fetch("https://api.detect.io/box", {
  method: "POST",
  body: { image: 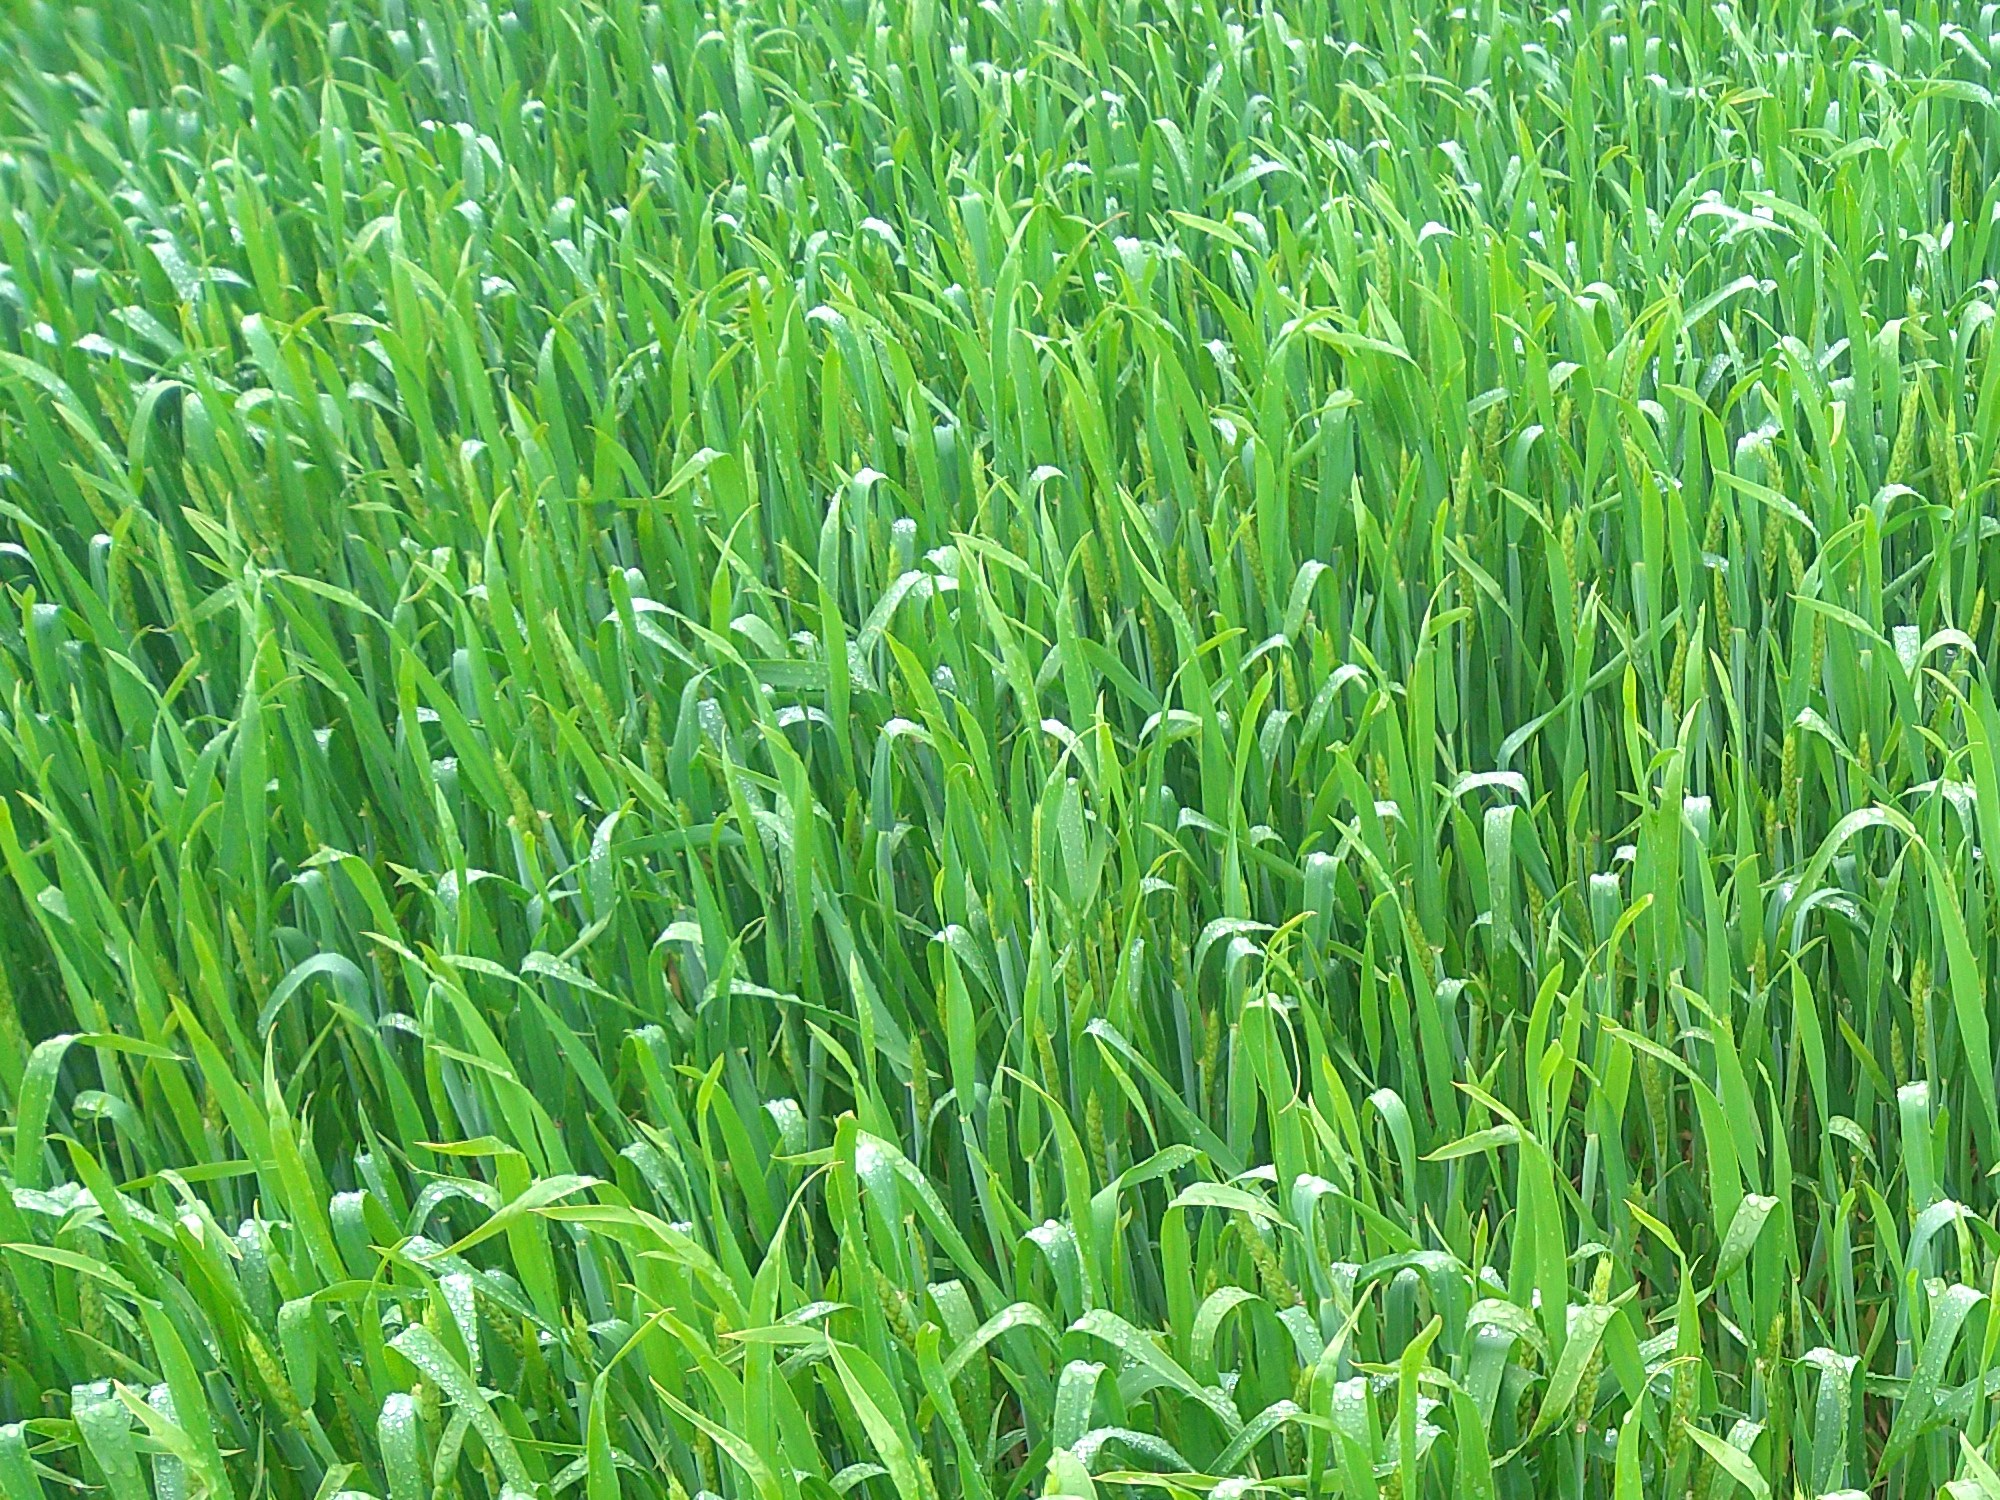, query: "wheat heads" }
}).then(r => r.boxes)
[647,699,661,778]
[315,270,354,374]
[547,623,606,751]
[537,188,551,219]
[1063,943,1080,1012]
[853,450,862,476]
[448,433,475,512]
[454,1477,474,1500]
[276,252,291,293]
[1399,444,1408,481]
[228,905,267,1004]
[356,486,375,534]
[1573,274,1582,298]
[1977,326,1990,371]
[1585,830,1596,872]
[1323,630,1335,664]
[965,241,992,348]
[1761,1316,1784,1363]
[1454,445,1473,519]
[1816,969,1827,1033]
[907,440,922,504]
[595,681,620,735]
[1645,1053,1665,1154]
[1575,894,1592,936]
[1848,1159,1864,1223]
[1781,732,1801,831]
[1119,341,1144,415]
[1175,548,1192,612]
[1472,1006,1482,1059]
[371,412,422,506]
[1289,1365,1316,1476]
[424,189,447,277]
[599,273,610,298]
[605,300,618,375]
[934,980,949,1021]
[70,419,90,462]
[553,128,565,161]
[1239,511,1269,595]
[1910,1186,1918,1233]
[741,383,752,412]
[1222,442,1249,504]
[1137,594,1161,685]
[1579,1349,1605,1422]
[1036,1184,1045,1218]
[1589,946,1596,970]
[871,245,886,296]
[1383,522,1403,583]
[994,704,1004,768]
[1712,566,1733,664]
[516,457,534,522]
[350,1046,375,1124]
[1378,1143,1392,1197]
[1028,804,1039,903]
[1171,935,1188,997]
[869,1268,913,1351]
[850,813,865,858]
[414,1454,435,1488]
[1911,957,1930,1049]
[0,1274,28,1357]
[1967,582,1985,660]
[911,1229,931,1285]
[114,547,136,624]
[885,543,902,593]
[720,7,733,40]
[1925,431,1946,498]
[1204,1009,1222,1081]
[1239,880,1251,918]
[1337,89,1352,142]
[1694,1455,1717,1500]
[1808,613,1825,686]
[421,1303,437,1425]
[1621,333,1639,403]
[1794,1294,1802,1346]
[191,3,213,65]
[1027,1019,1065,1109]
[703,733,727,788]
[904,0,915,39]
[1101,898,1119,988]
[1734,521,1746,564]
[876,291,926,369]
[217,428,276,539]
[1733,309,1742,341]
[489,752,552,846]
[1528,872,1542,930]
[1515,1338,1531,1434]
[866,504,883,566]
[1241,1218,1295,1312]
[451,245,481,348]
[1891,1023,1908,1082]
[482,1452,502,1500]
[950,517,962,535]
[553,167,567,197]
[95,998,111,1034]
[1085,936,1102,1008]
[1836,1173,1846,1200]
[1159,884,1166,947]
[1196,451,1209,515]
[839,383,864,446]
[1756,939,1768,990]
[1375,233,1390,307]
[1482,404,1500,461]
[985,888,1000,940]
[1457,534,1479,647]
[709,129,724,183]
[0,985,31,1058]
[1859,731,1872,809]
[419,298,445,347]
[1884,381,1924,485]
[208,465,258,543]
[1137,427,1157,502]
[508,164,556,278]
[1405,909,1438,981]
[972,447,993,534]
[1615,949,1624,1012]
[1623,306,1632,331]
[1697,319,1707,354]
[1657,99,1662,141]
[436,435,454,473]
[695,475,716,510]
[779,537,803,600]
[1963,173,1973,212]
[1952,130,1966,195]
[1203,1269,1218,1294]
[909,1030,932,1112]
[1595,479,1612,501]
[1807,311,1816,351]
[884,257,895,289]
[1542,503,1554,527]
[949,197,967,264]
[1557,394,1570,480]
[1087,1088,1119,1188]
[1702,491,1723,556]
[160,44,176,89]
[1602,212,1613,280]
[1756,449,1787,575]
[1588,1255,1616,1311]
[1375,754,1393,841]
[467,557,491,623]
[544,531,554,562]
[1907,295,1925,357]
[77,1259,103,1354]
[816,431,827,476]
[230,303,245,330]
[1662,630,1689,718]
[1153,88,1164,120]
[182,457,210,514]
[1765,797,1775,858]
[335,1377,363,1456]
[1079,541,1111,629]
[96,383,127,440]
[1946,410,1962,492]
[1281,658,1300,718]
[888,673,908,721]
[1924,662,1959,758]
[1571,840,1577,879]
[249,1329,308,1436]
[1009,525,1024,555]
[1176,860,1191,924]
[1707,311,1718,347]
[1628,1182,1646,1248]
[839,128,851,177]
[159,957,184,999]
[302,816,335,891]
[373,936,395,991]
[185,1471,208,1500]
[1180,261,1193,307]
[1048,322,1059,336]
[157,522,198,647]
[1784,534,1804,587]
[1094,491,1124,583]
[1595,20,1604,61]
[1121,458,1129,477]
[1624,440,1643,486]
[569,1308,595,1366]
[207,1090,225,1146]
[206,299,230,374]
[1666,1359,1694,1453]
[86,488,118,532]
[478,1286,530,1358]
[1061,393,1075,473]
[1386,1458,1406,1500]
[1416,303,1430,367]
[1559,512,1580,637]
[579,473,605,554]
[714,1312,736,1353]
[1945,866,1967,950]
[855,981,878,1059]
